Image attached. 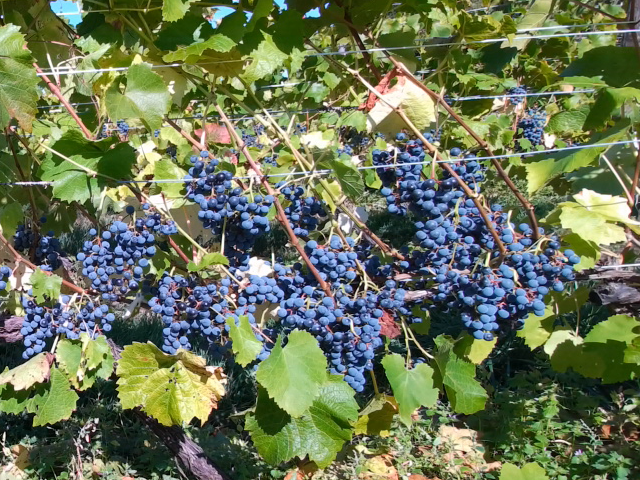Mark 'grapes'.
Here are the masks:
<instances>
[{
	"label": "grapes",
	"mask_w": 640,
	"mask_h": 480,
	"mask_svg": "<svg viewBox=\"0 0 640 480\" xmlns=\"http://www.w3.org/2000/svg\"><path fill=\"white\" fill-rule=\"evenodd\" d=\"M490 210L492 212H496V214L499 216L498 218H495L492 213L487 214L490 221L492 222L494 229L498 232V235L505 244L507 250L522 252L524 250V247H530L532 245L533 238L531 236L533 234V231L528 223L521 222L519 224V231L523 236L517 239L518 243L513 242L514 234L510 229H508L506 225L508 214L504 212V206L499 203H492L490 205Z\"/></svg>",
	"instance_id": "obj_7"
},
{
	"label": "grapes",
	"mask_w": 640,
	"mask_h": 480,
	"mask_svg": "<svg viewBox=\"0 0 640 480\" xmlns=\"http://www.w3.org/2000/svg\"><path fill=\"white\" fill-rule=\"evenodd\" d=\"M220 288L219 293L223 296H227L229 294V289L232 288L233 291L238 290L237 283L231 279L229 275L225 276V279L220 280Z\"/></svg>",
	"instance_id": "obj_15"
},
{
	"label": "grapes",
	"mask_w": 640,
	"mask_h": 480,
	"mask_svg": "<svg viewBox=\"0 0 640 480\" xmlns=\"http://www.w3.org/2000/svg\"><path fill=\"white\" fill-rule=\"evenodd\" d=\"M460 166L456 164L452 165V168L455 169L463 178L465 182L468 183L470 189H475L476 193L481 192V186L478 182H484L485 176L481 173H477L482 169V165L479 162L472 161L464 163H459Z\"/></svg>",
	"instance_id": "obj_9"
},
{
	"label": "grapes",
	"mask_w": 640,
	"mask_h": 480,
	"mask_svg": "<svg viewBox=\"0 0 640 480\" xmlns=\"http://www.w3.org/2000/svg\"><path fill=\"white\" fill-rule=\"evenodd\" d=\"M189 161L194 167L188 169V174L184 178L198 177L195 184L187 185V197L194 200L202 208L198 212V218L204 229H210L213 235H219L222 232L221 224L224 217L232 218L235 210L240 213V218L234 222L226 223L224 254L230 260L229 271L235 273L247 272L251 265V254L249 252L242 253L231 248L235 245L237 249L248 250L250 245L255 242V235L269 233L271 224L269 218L262 214H268L275 202L273 195H256L255 202H249L247 196L242 197L243 189L241 187L232 188L229 194H226L232 186L231 176L233 175L227 169H223L220 173L213 175L215 166L219 164L217 159H212L210 164L205 166L197 155H191Z\"/></svg>",
	"instance_id": "obj_2"
},
{
	"label": "grapes",
	"mask_w": 640,
	"mask_h": 480,
	"mask_svg": "<svg viewBox=\"0 0 640 480\" xmlns=\"http://www.w3.org/2000/svg\"><path fill=\"white\" fill-rule=\"evenodd\" d=\"M20 303L25 308L24 320L22 321V329L20 334L23 336V345L27 348L21 352V357L28 360L36 353H40L46 346V338H54L57 334H66L67 339H79L80 334L87 332L91 339H96L98 332L91 328L95 326V319H101V330L103 332H112L113 323L116 320L114 312H108L107 304H101L94 308L92 302H88L85 308L80 309V313L76 315L77 320H87L82 322L79 327H75L73 322L67 326L56 327L55 325L64 324L73 316L74 310L69 309L63 311V305L56 303L52 312H46L43 307L36 306L32 301H28L26 296L19 298Z\"/></svg>",
	"instance_id": "obj_5"
},
{
	"label": "grapes",
	"mask_w": 640,
	"mask_h": 480,
	"mask_svg": "<svg viewBox=\"0 0 640 480\" xmlns=\"http://www.w3.org/2000/svg\"><path fill=\"white\" fill-rule=\"evenodd\" d=\"M423 166L400 167L399 169L390 168L377 169V176L382 182L383 187L380 194L385 199L387 211L396 217H404L407 214L405 206L395 204L396 196L392 194V190L388 188L390 183L398 182L399 198L402 202L410 203V211L418 216L428 215L432 218L430 221L421 220L415 222V236L421 241L423 248L431 250L423 253L415 250L413 252V260L400 261L399 268L407 273L417 271L422 275H428L430 269L426 267L429 262H433L431 270L437 273L435 281L438 285L437 293L431 297L433 303H424L422 298L414 300H405L407 283L400 281L397 283L394 279H388L385 282L384 290L377 293L369 290L365 293V297L355 299L354 301L344 295L340 288V278H347L354 281L357 274L348 268H355V260L360 257H368L370 255V244L364 242L356 244L351 236H347L345 240L350 247L354 246V252L343 253L328 251L319 248V244L315 240H309L304 247L306 254L310 257V262L315 265V269L319 272L325 282H329L332 291H337L335 298L326 295L322 289L314 288L317 281L312 273L306 276L302 271L303 265L300 262L294 264L297 270L295 274L289 278L288 275L293 273L291 268H283L280 263L274 265V271L278 274V278L272 279L268 276H260L259 274H251L245 289L237 294L238 308L234 312H225L223 317L217 314L215 321L223 324L225 319L233 317L234 324L240 325L238 316H248L249 323L253 327H257L254 314L257 311L255 304L263 305L265 299L272 304L278 303L279 309L277 313L281 320L279 324L288 328L297 326L300 329L308 328L310 332L316 336L318 341H324L330 344V351L325 353V357L330 360L333 365L329 368L331 374L345 373L343 380L350 385L355 392H363L368 384V379L363 374L365 370L372 371L374 369V360L378 348L384 344V340L380 335L381 320L385 315L384 309L398 308V312L403 315L409 323L423 322L421 316H414L411 308L415 305H421L422 311L436 310L440 306L443 313H448L451 307L462 308L464 304L469 308H474L476 303L477 311L481 314V320H474V315L470 311H463L460 314V321L465 328L476 329L473 332L475 339H483L488 342L494 340L491 332L500 329L499 323L496 321L497 316L507 319L511 314H515L517 309L533 310L537 317L545 315L546 304L544 303L545 295L549 293V287H552L556 293L565 291V283L562 280H556L560 274L569 282L575 280V273L572 271L574 265L581 263V258L575 255L573 249L566 248L564 256L569 259L567 261L562 256H558L557 260L564 264V267H555L551 263V256L555 254V250H560L562 245L556 235L550 237L549 247L544 249V253L534 255L533 252H525L523 254L509 253L507 255L508 264L502 262L494 275L491 267H485L483 262L477 266V272L473 278H469L467 274H460L452 271L446 262L453 258L454 249L447 247L452 243H458L463 237V246L458 245L455 249V262L451 264L453 269L464 272L473 269L478 262L479 257L476 254L481 252V246L475 242L472 235L465 233L475 232L479 229V224L484 222L481 212L474 204L473 199L465 196L459 203L458 212L460 214V223L454 225L453 219L456 217L451 212L447 217L444 213L448 211L452 205L457 203V198L465 195V190L460 186L455 177L444 170V178L440 179L439 190L433 187L435 181L426 179L420 181ZM517 270V280L526 284L530 290L535 291V299L526 298L527 291L522 288H516L513 294L515 282L514 271ZM347 311L353 313V323L357 325L354 331L359 338L355 343V335L350 331L330 332L326 325H332L337 321V317H342L341 322L344 326H349L351 320L348 316H343Z\"/></svg>",
	"instance_id": "obj_1"
},
{
	"label": "grapes",
	"mask_w": 640,
	"mask_h": 480,
	"mask_svg": "<svg viewBox=\"0 0 640 480\" xmlns=\"http://www.w3.org/2000/svg\"><path fill=\"white\" fill-rule=\"evenodd\" d=\"M255 336L256 339L262 343L260 353L256 355V359L265 361L271 354V350L274 348V344L266 342V339L259 332H256Z\"/></svg>",
	"instance_id": "obj_14"
},
{
	"label": "grapes",
	"mask_w": 640,
	"mask_h": 480,
	"mask_svg": "<svg viewBox=\"0 0 640 480\" xmlns=\"http://www.w3.org/2000/svg\"><path fill=\"white\" fill-rule=\"evenodd\" d=\"M12 276V268L7 265H3L0 267V291L5 290L7 287V283L3 281V277H11Z\"/></svg>",
	"instance_id": "obj_16"
},
{
	"label": "grapes",
	"mask_w": 640,
	"mask_h": 480,
	"mask_svg": "<svg viewBox=\"0 0 640 480\" xmlns=\"http://www.w3.org/2000/svg\"><path fill=\"white\" fill-rule=\"evenodd\" d=\"M55 235L54 231H49L45 237L38 238V246L35 248V255L42 257L47 255V260L50 263L41 264L40 269L42 271H56L62 266V261L57 259V254L63 257H67L68 253L60 249V243L58 239H52Z\"/></svg>",
	"instance_id": "obj_8"
},
{
	"label": "grapes",
	"mask_w": 640,
	"mask_h": 480,
	"mask_svg": "<svg viewBox=\"0 0 640 480\" xmlns=\"http://www.w3.org/2000/svg\"><path fill=\"white\" fill-rule=\"evenodd\" d=\"M405 144L411 145L409 152H402L398 156L397 162L417 161L425 158V153L423 152L422 142L420 139L406 140Z\"/></svg>",
	"instance_id": "obj_11"
},
{
	"label": "grapes",
	"mask_w": 640,
	"mask_h": 480,
	"mask_svg": "<svg viewBox=\"0 0 640 480\" xmlns=\"http://www.w3.org/2000/svg\"><path fill=\"white\" fill-rule=\"evenodd\" d=\"M35 240V234L32 232H28L25 234V228L23 224H20L17 227V232L14 241V249L18 252H23L24 248H28L31 246V242Z\"/></svg>",
	"instance_id": "obj_12"
},
{
	"label": "grapes",
	"mask_w": 640,
	"mask_h": 480,
	"mask_svg": "<svg viewBox=\"0 0 640 480\" xmlns=\"http://www.w3.org/2000/svg\"><path fill=\"white\" fill-rule=\"evenodd\" d=\"M481 243L483 245L486 246V248L489 251H493L491 253V257L493 259H496L497 257H499L501 255V252L499 250H496L498 248V244L496 243V240L493 238V236L491 235L487 225H483L481 227V237H480Z\"/></svg>",
	"instance_id": "obj_13"
},
{
	"label": "grapes",
	"mask_w": 640,
	"mask_h": 480,
	"mask_svg": "<svg viewBox=\"0 0 640 480\" xmlns=\"http://www.w3.org/2000/svg\"><path fill=\"white\" fill-rule=\"evenodd\" d=\"M286 180L276 182L274 187L280 189L281 194L286 197L288 202H291L290 206L284 208L286 218L289 220L290 227L293 229V233L296 236L305 237L309 234V230H314L319 224V220L315 217H309L308 215L301 216L302 212L314 216L316 213L325 218L327 214L322 209L320 202L315 197L300 198L306 194V190L303 187H297L296 185L287 186Z\"/></svg>",
	"instance_id": "obj_6"
},
{
	"label": "grapes",
	"mask_w": 640,
	"mask_h": 480,
	"mask_svg": "<svg viewBox=\"0 0 640 480\" xmlns=\"http://www.w3.org/2000/svg\"><path fill=\"white\" fill-rule=\"evenodd\" d=\"M144 217L135 220V227L138 228L140 235L129 230V226L121 220H114L109 227V231H103L102 240L99 245H93L91 240L82 242L81 250L76 256L77 261H83V269L81 276L89 278L91 287L94 290L103 292L101 298L107 301H116L118 295L116 293H107L114 290V286L119 287L121 294H126L129 290L136 291L142 280L141 275L144 273L143 268L149 265L148 259L144 256L153 257L157 253V248L153 245L147 246L148 243L155 242V236L149 230H143L144 227L152 228L153 232H159L161 235H176L178 233L177 223L174 221H166L165 225H161V214L145 213ZM116 234L113 240L117 242V246L111 252L110 244L106 241ZM139 266L134 268V274L124 270V264L133 266L136 262ZM121 275L130 280L127 286L123 285L121 278H112L109 282V275Z\"/></svg>",
	"instance_id": "obj_3"
},
{
	"label": "grapes",
	"mask_w": 640,
	"mask_h": 480,
	"mask_svg": "<svg viewBox=\"0 0 640 480\" xmlns=\"http://www.w3.org/2000/svg\"><path fill=\"white\" fill-rule=\"evenodd\" d=\"M363 265L366 267V273L369 276L383 277L393 274V266H382V263L379 262V258L377 256H372L371 259H365L363 261Z\"/></svg>",
	"instance_id": "obj_10"
},
{
	"label": "grapes",
	"mask_w": 640,
	"mask_h": 480,
	"mask_svg": "<svg viewBox=\"0 0 640 480\" xmlns=\"http://www.w3.org/2000/svg\"><path fill=\"white\" fill-rule=\"evenodd\" d=\"M173 282L177 287H189L192 289V294L188 296V302L190 304H195L197 301L201 303L198 309L188 307V305L183 302L177 304V299L181 297L182 292L180 290L169 291V287ZM158 285L159 288L152 287V280L145 279L143 281L142 292L155 296L148 300V305L154 313H162V320L168 325V327L162 329V337L165 339L162 346L164 353L174 355L180 347L187 351L192 349V344L186 336L181 335L179 340H177L181 329L185 331L187 336H190L194 329H201V333L206 336L207 342L211 343L209 350L215 358H221L228 349L232 348V341H226L223 347H219L218 344L214 343L219 340L221 330L219 327L211 325V311L209 307L212 305V308L215 309L216 312H222L223 308H228V301L224 297L219 298L218 303H213V298L217 294L218 289L216 283H208L205 287L198 286L196 282L190 281L187 277L175 275L172 278L170 273L165 271L162 279L158 281ZM176 304L180 311L186 310L188 317L186 321H181L180 323L174 322L176 312L173 306Z\"/></svg>",
	"instance_id": "obj_4"
}]
</instances>
